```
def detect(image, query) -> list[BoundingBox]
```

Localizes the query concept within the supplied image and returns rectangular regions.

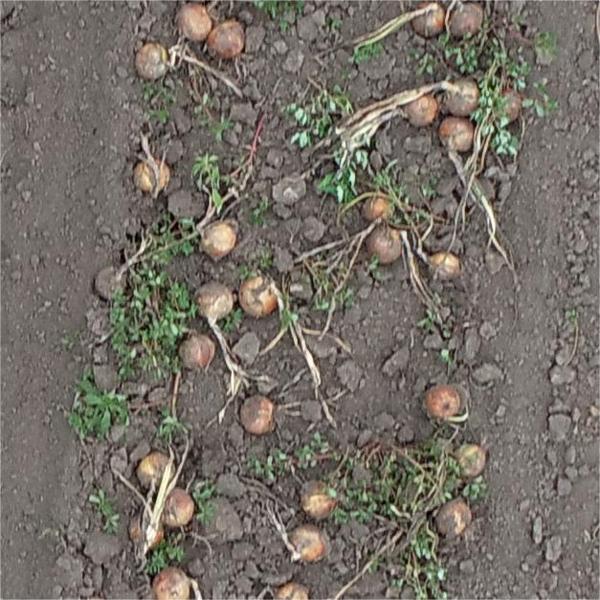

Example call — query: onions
[454,442,483,475]
[238,395,276,433]
[238,273,278,314]
[303,486,339,518]
[131,516,159,547]
[278,580,305,599]
[360,193,390,221]
[497,93,524,121]
[152,568,192,599]
[423,384,462,421]
[429,252,462,281]
[93,263,123,299]
[412,3,445,36]
[445,4,479,38]
[206,21,242,57]
[162,490,194,524]
[192,281,232,320]
[133,40,168,78]
[134,451,168,484]
[137,161,169,191]
[176,334,214,370]
[365,226,399,262]
[286,522,325,561]
[437,116,473,151]
[405,95,437,126]
[439,77,476,115]
[177,3,211,40]
[199,219,235,257]
[433,498,470,535]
